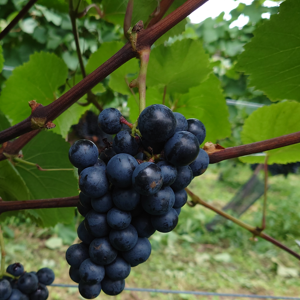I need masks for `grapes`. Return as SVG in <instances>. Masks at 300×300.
Wrapping results in <instances>:
<instances>
[{"instance_id": "1", "label": "grapes", "mask_w": 300, "mask_h": 300, "mask_svg": "<svg viewBox=\"0 0 300 300\" xmlns=\"http://www.w3.org/2000/svg\"><path fill=\"white\" fill-rule=\"evenodd\" d=\"M98 123L115 135L112 147L99 152L91 140L78 139L69 149L81 190L77 210L85 219L77 228L82 242L70 245L65 259L85 299L124 290L131 267L151 255L148 239L177 226L185 188L210 164L200 147L205 125L166 105L145 107L132 128L114 107L105 108Z\"/></svg>"}]
</instances>
